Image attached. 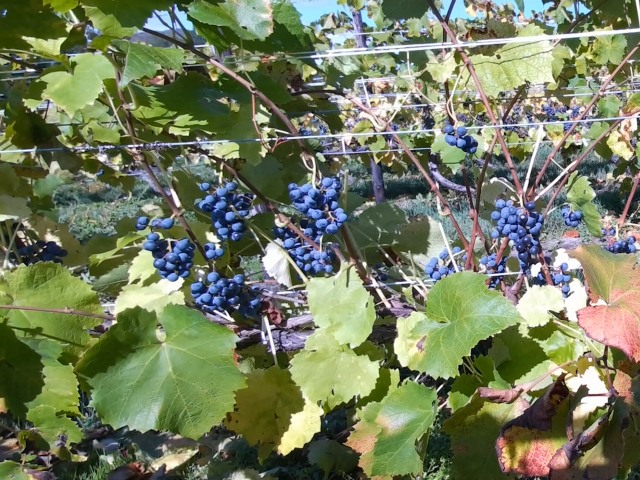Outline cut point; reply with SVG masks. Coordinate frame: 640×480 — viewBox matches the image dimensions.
<instances>
[{"label":"cut point","mask_w":640,"mask_h":480,"mask_svg":"<svg viewBox=\"0 0 640 480\" xmlns=\"http://www.w3.org/2000/svg\"><path fill=\"white\" fill-rule=\"evenodd\" d=\"M466 68H467V65H466V63H465V64L463 65V68H462V70H461V72H460L459 77L457 78V80H455V82H454V83H453V85H452L451 95H454V91H455V90H456V88L458 87V83L461 81V79H462V77H463V75H464V73H465Z\"/></svg>","instance_id":"obj_1"}]
</instances>
